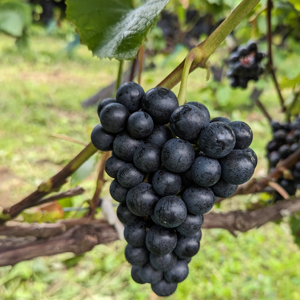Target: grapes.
Masks as SVG:
<instances>
[{
    "mask_svg": "<svg viewBox=\"0 0 300 300\" xmlns=\"http://www.w3.org/2000/svg\"><path fill=\"white\" fill-rule=\"evenodd\" d=\"M97 114L90 140L111 151L105 171L114 178L109 191L119 203L131 277L171 295L200 249L203 214L255 171L252 129L225 117L210 120L204 105H179L173 91L145 93L134 81L121 84L116 99L101 100Z\"/></svg>",
    "mask_w": 300,
    "mask_h": 300,
    "instance_id": "obj_1",
    "label": "grapes"
}]
</instances>
